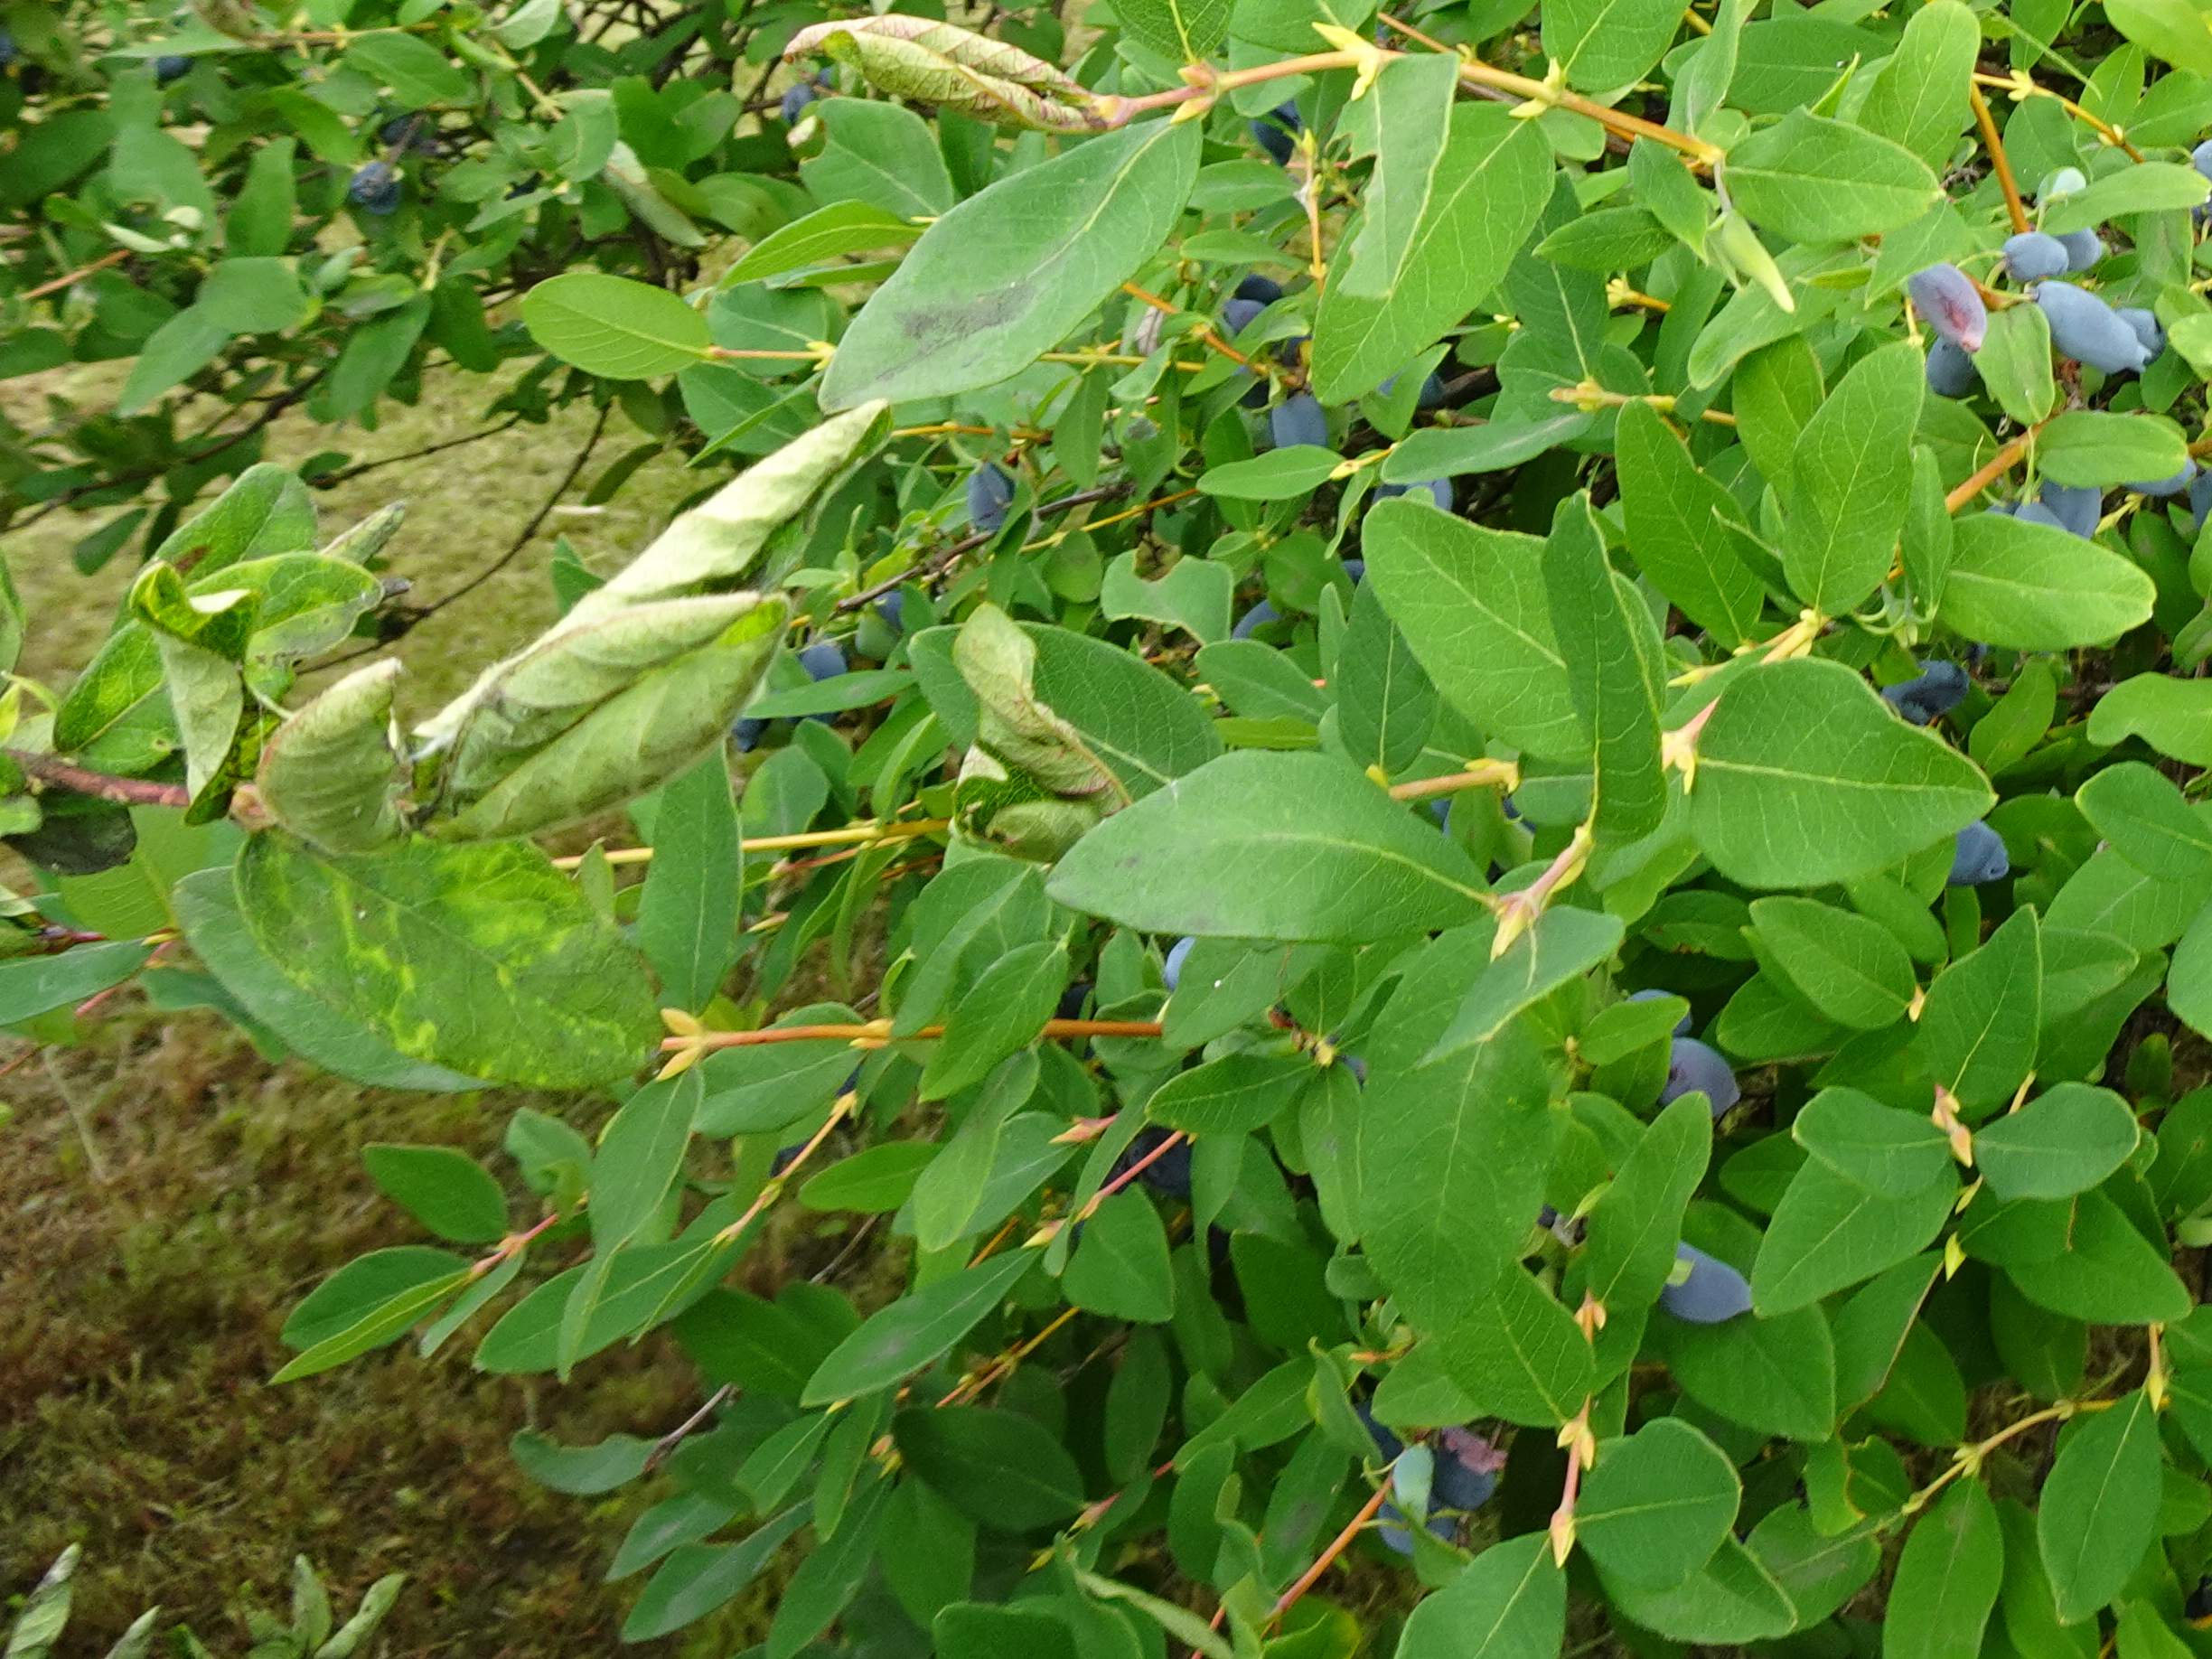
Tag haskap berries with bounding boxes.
[1381,1505,1452,1553]
[1139,1128,1190,1189]
[1662,1042,1741,1122]
[1344,561,1364,577]
[2125,473,2195,494]
[2041,226,2101,271]
[2192,466,2212,528]
[1373,484,1408,500]
[1362,1409,1395,1458]
[2035,281,2142,376]
[1254,125,1292,163]
[1970,647,1986,662]
[155,56,195,82]
[879,591,903,624]
[1273,335,1310,365]
[1395,1446,1433,1507]
[1227,300,1261,329]
[378,614,403,641]
[966,467,1012,528]
[2041,485,2102,542]
[1,39,17,62]
[1433,1433,1500,1505]
[1987,498,2019,514]
[1905,260,1987,349]
[785,85,809,117]
[1065,985,1092,1014]
[1207,1230,1228,1265]
[1229,600,1280,644]
[1408,474,1455,507]
[1926,332,1974,398]
[380,109,425,146]
[1345,1058,1364,1081]
[839,1072,859,1095]
[855,614,899,655]
[1230,368,1268,407]
[1946,825,2010,882]
[1274,391,1325,444]
[1887,661,1965,716]
[353,166,399,211]
[1663,1245,1755,1322]
[1428,798,1452,816]
[2120,310,2164,364]
[1168,932,1193,982]
[1104,1156,1130,1191]
[2018,502,2065,529]
[803,639,848,676]
[2004,231,2070,275]
[1277,103,1300,126]
[1630,989,1693,1034]
[817,69,831,87]
[2188,135,2212,184]
[1237,276,1280,299]
[1505,800,1517,819]
[1540,1208,1556,1230]
[1380,371,1449,402]
[735,717,766,754]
